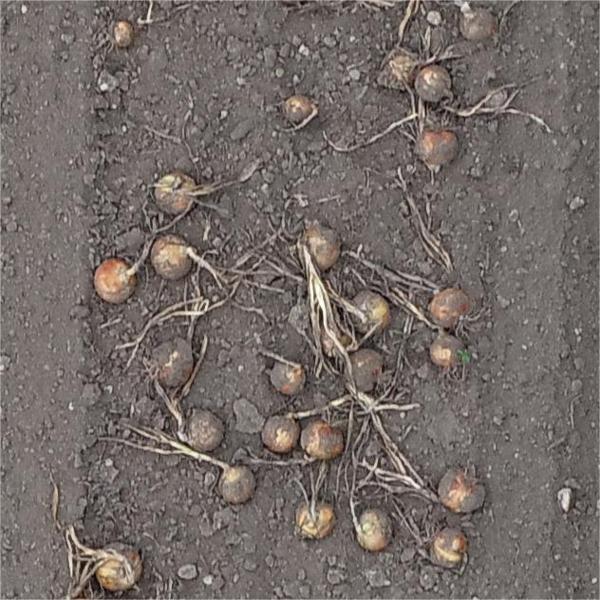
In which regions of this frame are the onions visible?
[294,499,333,538]
[429,286,469,326]
[416,126,457,166]
[150,338,194,390]
[153,235,193,279]
[301,420,342,460]
[263,415,298,453]
[154,170,192,212]
[283,92,311,121]
[182,409,223,452]
[384,50,415,86]
[440,469,481,511]
[348,291,391,334]
[97,546,138,590]
[412,64,448,100]
[344,348,383,392]
[300,224,338,268]
[94,257,136,303]
[269,357,303,393]
[458,8,495,43]
[427,335,457,366]
[109,19,134,46]
[216,464,253,503]
[356,507,393,550]
[427,529,464,567]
